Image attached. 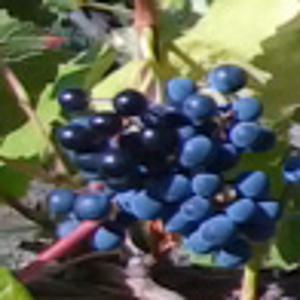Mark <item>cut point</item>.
<instances>
[{
    "label": "cut point",
    "instance_id": "6a23745f",
    "mask_svg": "<svg viewBox=\"0 0 300 300\" xmlns=\"http://www.w3.org/2000/svg\"><path fill=\"white\" fill-rule=\"evenodd\" d=\"M140 49L142 54L145 56V59L138 66V69L142 71L147 67L148 64L152 65V69L146 76L143 85L147 87L150 81L156 79V94L161 96L163 94V73L162 67L158 64V61L155 58L154 31L151 25L141 30Z\"/></svg>",
    "mask_w": 300,
    "mask_h": 300
}]
</instances>
